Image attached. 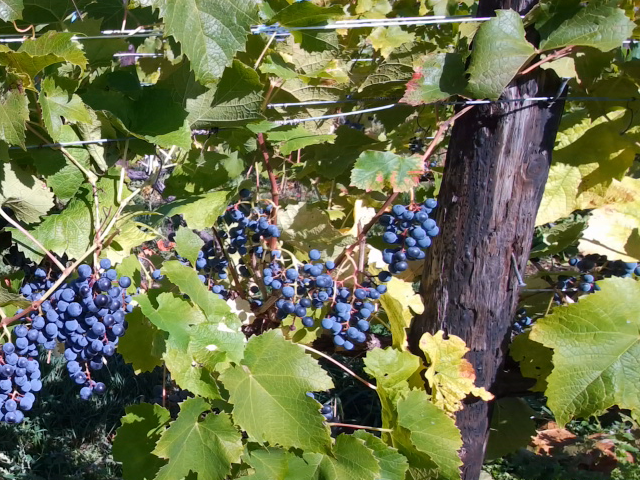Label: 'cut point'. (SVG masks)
<instances>
[{"instance_id":"cut-point-1","label":"cut point","mask_w":640,"mask_h":480,"mask_svg":"<svg viewBox=\"0 0 640 480\" xmlns=\"http://www.w3.org/2000/svg\"><path fill=\"white\" fill-rule=\"evenodd\" d=\"M345 257H346V258H345V260H344V263L341 265V268H342V269H346V268L349 266V262H350V264H351L352 268H353L355 271H358V270H359V267H358L357 263L355 262V260L353 259V257L351 256V254H350V253H346V254H345Z\"/></svg>"}]
</instances>
